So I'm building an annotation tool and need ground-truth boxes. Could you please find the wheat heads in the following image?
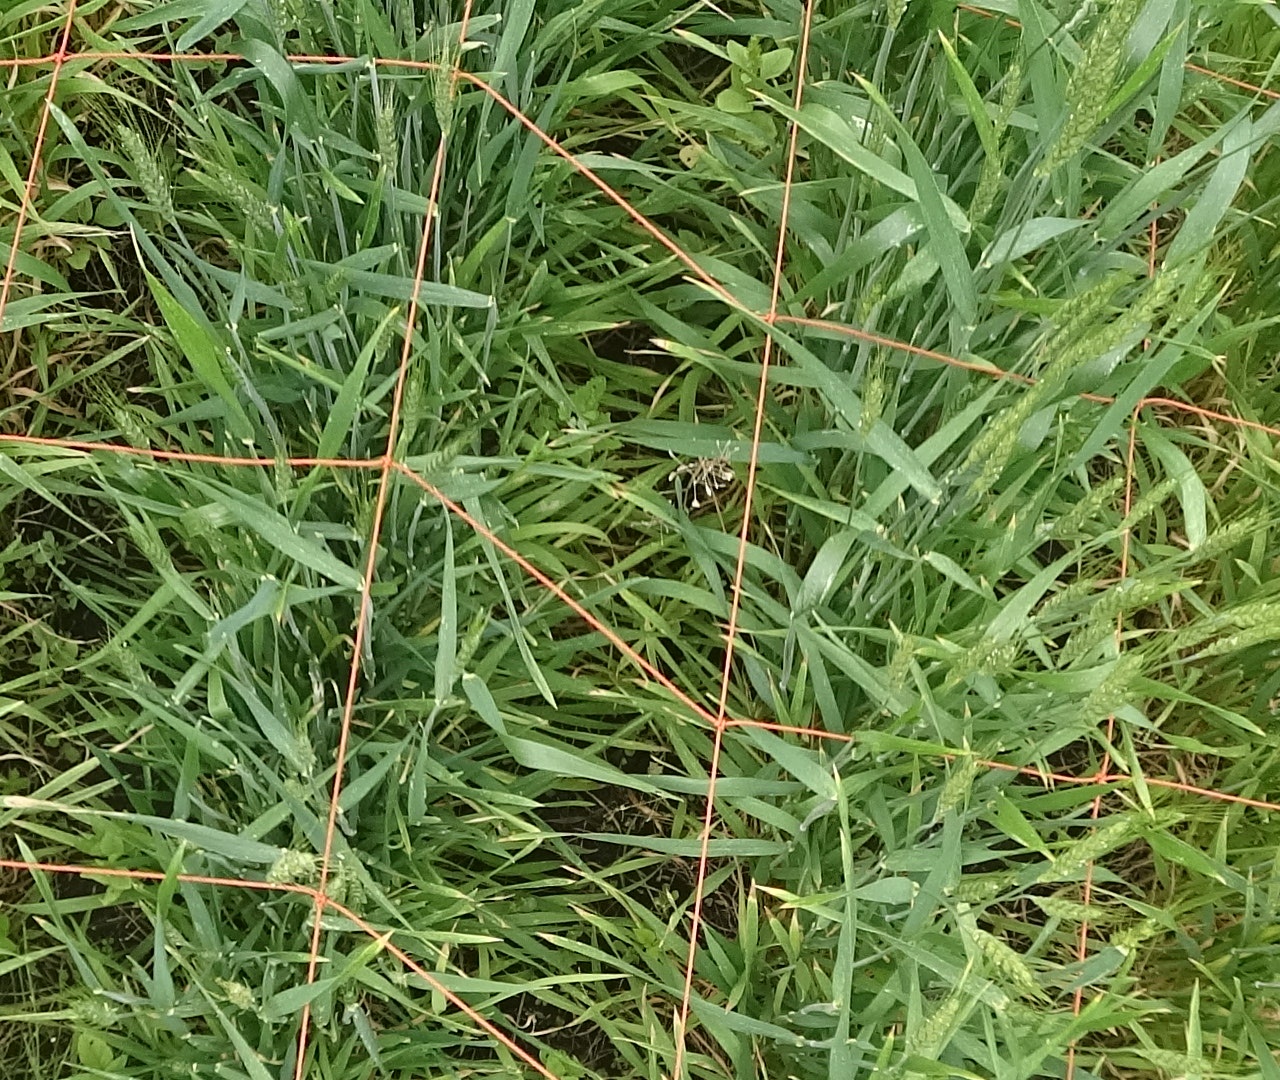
[423,67,455,131]
[945,642,1019,686]
[285,730,319,786]
[127,523,167,574]
[310,878,348,924]
[1069,475,1116,535]
[1084,275,1191,366]
[119,130,174,221]
[1197,522,1245,556]
[1041,54,1119,164]
[1062,0,1135,96]
[219,974,252,1010]
[194,512,225,551]
[211,344,256,400]
[1087,655,1141,720]
[399,382,425,432]
[375,108,401,168]
[962,435,1013,507]
[108,636,143,686]
[1042,581,1082,619]
[1092,582,1150,619]
[271,851,311,887]
[932,762,978,819]
[1024,892,1106,923]
[1059,624,1112,672]
[420,439,467,483]
[445,630,488,686]
[964,362,1070,464]
[1176,593,1273,643]
[1048,812,1134,879]
[1130,477,1174,532]
[1130,1040,1209,1076]
[1032,282,1113,356]
[943,880,1000,905]
[269,454,292,498]
[967,167,1001,223]
[845,281,879,333]
[58,992,113,1026]
[101,399,152,458]
[856,375,886,430]
[994,67,1024,135]
[904,998,962,1059]
[889,635,912,692]
[966,935,1035,993]
[374,320,393,356]
[224,176,275,225]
